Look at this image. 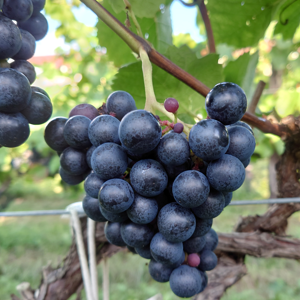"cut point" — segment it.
<instances>
[{
	"mask_svg": "<svg viewBox=\"0 0 300 300\" xmlns=\"http://www.w3.org/2000/svg\"><path fill=\"white\" fill-rule=\"evenodd\" d=\"M139 54L142 61V71L144 75V85L146 92L145 109L153 113V107L155 105V94L152 85V66L151 62L149 61L148 54L143 48L139 49Z\"/></svg>",
	"mask_w": 300,
	"mask_h": 300,
	"instance_id": "6a23745f",
	"label": "cut point"
}]
</instances>
